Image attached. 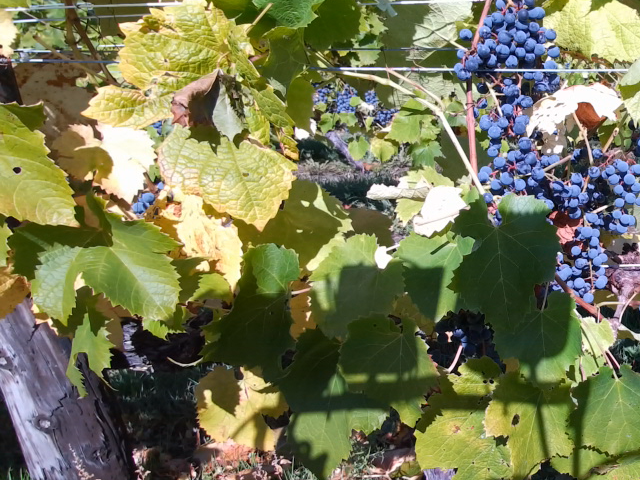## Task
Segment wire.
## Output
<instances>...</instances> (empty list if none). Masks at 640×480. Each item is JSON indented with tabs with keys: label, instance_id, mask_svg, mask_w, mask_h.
<instances>
[{
	"label": "wire",
	"instance_id": "4f2155b8",
	"mask_svg": "<svg viewBox=\"0 0 640 480\" xmlns=\"http://www.w3.org/2000/svg\"><path fill=\"white\" fill-rule=\"evenodd\" d=\"M60 63V64H77V65H92V64H106V63H119V58H104V59H90V60H80V59H62V58H48V57H39V58H23V59H11V58H0V63H8V64H25V63Z\"/></svg>",
	"mask_w": 640,
	"mask_h": 480
},
{
	"label": "wire",
	"instance_id": "d2f4af69",
	"mask_svg": "<svg viewBox=\"0 0 640 480\" xmlns=\"http://www.w3.org/2000/svg\"><path fill=\"white\" fill-rule=\"evenodd\" d=\"M477 73L481 74H492V73H525V72H543V73H564V74H601V73H609L616 72L621 74H627L630 72L629 68H618V67H607V68H599V69H584V68H544V67H522V68H490L483 69L477 68Z\"/></svg>",
	"mask_w": 640,
	"mask_h": 480
},
{
	"label": "wire",
	"instance_id": "a73af890",
	"mask_svg": "<svg viewBox=\"0 0 640 480\" xmlns=\"http://www.w3.org/2000/svg\"><path fill=\"white\" fill-rule=\"evenodd\" d=\"M308 71L332 72V71H350V72H454V67H388V66H370V67H353V66H308Z\"/></svg>",
	"mask_w": 640,
	"mask_h": 480
}]
</instances>
